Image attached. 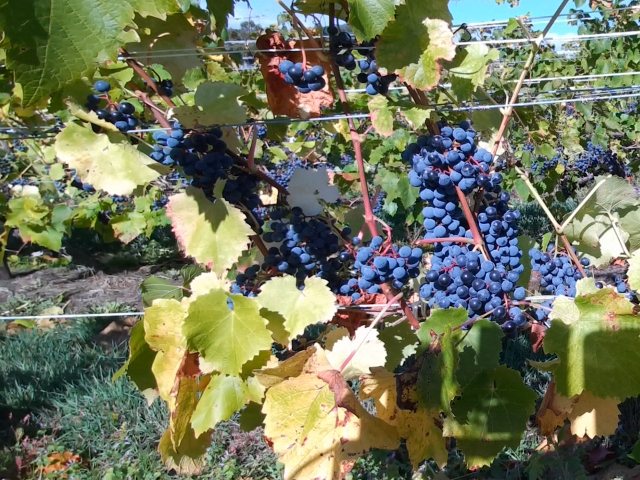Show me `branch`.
<instances>
[{
	"instance_id": "1",
	"label": "branch",
	"mask_w": 640,
	"mask_h": 480,
	"mask_svg": "<svg viewBox=\"0 0 640 480\" xmlns=\"http://www.w3.org/2000/svg\"><path fill=\"white\" fill-rule=\"evenodd\" d=\"M334 7H335V3L333 1H330L327 4V14H328V17H329L328 26H329V30H330V35L328 36L330 55H324L320 51H317L316 55L321 60H323L324 62H332L333 73H334L336 86L338 88V97H339L340 104H341V106L344 109L346 114H351L352 113V109H351L350 105L348 104V101H347V98H346V95H345V85L343 83L341 70L337 66L336 60H335V57L337 56V49H336L337 28H336V24H335V22H336V14H335V11H334Z\"/></svg>"
},
{
	"instance_id": "2",
	"label": "branch",
	"mask_w": 640,
	"mask_h": 480,
	"mask_svg": "<svg viewBox=\"0 0 640 480\" xmlns=\"http://www.w3.org/2000/svg\"><path fill=\"white\" fill-rule=\"evenodd\" d=\"M347 126H348V130L350 132V137L352 140V145L354 148V156H355V162H356V168H357V173L359 176V186L361 188V193H362V203L364 205L365 208V216H366V220L369 226V230L370 233L373 236H376L378 234V230L376 227V223L372 214V206H371V202L369 200V191H368V185L366 183V174H365V170H364V166H363V160H362V153H361V146H360V142H359V137L357 134V130L355 127V123L353 119H348L347 120Z\"/></svg>"
},
{
	"instance_id": "3",
	"label": "branch",
	"mask_w": 640,
	"mask_h": 480,
	"mask_svg": "<svg viewBox=\"0 0 640 480\" xmlns=\"http://www.w3.org/2000/svg\"><path fill=\"white\" fill-rule=\"evenodd\" d=\"M514 169L517 171L519 177L525 182V184L527 185V187L532 191V193L534 194V196L536 197L538 203L541 205L546 217L549 219V221L552 223L553 228L555 229V231L558 233V235L560 236L561 240L564 242V244L566 245V247L568 248V251L570 253V256L575 264V266L579 269L581 275L584 278H588L589 276H586L584 273V267L583 265L579 262V259L577 258L576 255H574L573 251L571 250V247H573V245L569 242V240L566 238L565 233L562 231V229L560 228V226L558 225L556 219L553 217V215L550 213L546 202L543 200L542 196L540 195V193L538 192V190L536 189V187L532 184V182L529 180L528 177L525 176V174L523 173L522 169L518 166L515 165Z\"/></svg>"
},
{
	"instance_id": "4",
	"label": "branch",
	"mask_w": 640,
	"mask_h": 480,
	"mask_svg": "<svg viewBox=\"0 0 640 480\" xmlns=\"http://www.w3.org/2000/svg\"><path fill=\"white\" fill-rule=\"evenodd\" d=\"M454 187L458 192V195H459L458 199H459V201L461 203L462 209L464 210V218L468 221L469 227L471 229V233H472V235L474 237L473 243L475 245H478V244L481 243V245L483 246V249L485 250V252L487 254L488 260L490 261V257H489V255L487 253V249H486L484 240H482L481 234H480V232L478 230V227L476 225L475 218L473 216H471V208L469 207L468 200H467L466 196L463 194V192L457 186H454Z\"/></svg>"
},
{
	"instance_id": "5",
	"label": "branch",
	"mask_w": 640,
	"mask_h": 480,
	"mask_svg": "<svg viewBox=\"0 0 640 480\" xmlns=\"http://www.w3.org/2000/svg\"><path fill=\"white\" fill-rule=\"evenodd\" d=\"M227 154L229 156H231L233 159H235L237 162H239L240 164H242L243 166L248 168L251 173L255 174L257 177L261 178L263 181H265L268 184H270L279 193L283 194L284 196H288L289 195V192L286 190V187L283 184H280L279 182H275L274 180H272L268 176L264 175L262 172L258 171L256 168H254L253 165H251L245 159H243L240 156H238L231 149L227 150Z\"/></svg>"
},
{
	"instance_id": "6",
	"label": "branch",
	"mask_w": 640,
	"mask_h": 480,
	"mask_svg": "<svg viewBox=\"0 0 640 480\" xmlns=\"http://www.w3.org/2000/svg\"><path fill=\"white\" fill-rule=\"evenodd\" d=\"M540 46H541V42H537L533 46L532 53H531L529 59L526 62L525 68H524V70H523V72H522V74H521V76H520V78L518 80V84H517V86H516V88L514 90L513 95L510 98V103H515V101H516V99H517V97H518V95L520 93V90H521V88L523 86V83L525 81V78L527 77V74H528V72H529V70L531 68L532 62L535 60V57L537 55V51H538Z\"/></svg>"
},
{
	"instance_id": "7",
	"label": "branch",
	"mask_w": 640,
	"mask_h": 480,
	"mask_svg": "<svg viewBox=\"0 0 640 480\" xmlns=\"http://www.w3.org/2000/svg\"><path fill=\"white\" fill-rule=\"evenodd\" d=\"M128 64H129V65H131V67H132V68H134V69L138 72V74H139V76L142 78V80H143V81H144L148 86H151V87L155 90V92H156V93H157L161 98H163V99H164V100H165V101H166V102H167L171 107H174V106H175L174 101H173V100H172V99H171L167 94H165V93H164V92L159 88V86H158L155 82L151 81V80L147 77V75L143 72L142 68H141L137 63H135L134 61H132V62H128Z\"/></svg>"
},
{
	"instance_id": "8",
	"label": "branch",
	"mask_w": 640,
	"mask_h": 480,
	"mask_svg": "<svg viewBox=\"0 0 640 480\" xmlns=\"http://www.w3.org/2000/svg\"><path fill=\"white\" fill-rule=\"evenodd\" d=\"M129 85L139 94L140 97H142L147 102V104L149 105V107H150V109L152 111V114H153L154 118L157 119L162 126L170 127V124L168 122H166L163 119L162 115L157 111L156 106L154 105V103L150 99V97L147 96L143 92V90L138 85H136V83L134 81H130Z\"/></svg>"
},
{
	"instance_id": "9",
	"label": "branch",
	"mask_w": 640,
	"mask_h": 480,
	"mask_svg": "<svg viewBox=\"0 0 640 480\" xmlns=\"http://www.w3.org/2000/svg\"><path fill=\"white\" fill-rule=\"evenodd\" d=\"M278 5L280 7H282V9L284 11L287 12V14L294 20L296 21V23L298 24V26L303 30V32L307 35L308 39L310 40V42L312 43L313 46L317 45V41L314 38L312 32L307 28V26L302 22L301 18L298 17L293 11L292 9L287 6L282 0L278 1Z\"/></svg>"
},
{
	"instance_id": "10",
	"label": "branch",
	"mask_w": 640,
	"mask_h": 480,
	"mask_svg": "<svg viewBox=\"0 0 640 480\" xmlns=\"http://www.w3.org/2000/svg\"><path fill=\"white\" fill-rule=\"evenodd\" d=\"M403 84L405 85V87L408 89V93L409 95L412 97L413 101L415 102L416 105H429L431 103V100L428 98V96L419 89H416V91L411 87V85H407L406 82H403Z\"/></svg>"
},
{
	"instance_id": "11",
	"label": "branch",
	"mask_w": 640,
	"mask_h": 480,
	"mask_svg": "<svg viewBox=\"0 0 640 480\" xmlns=\"http://www.w3.org/2000/svg\"><path fill=\"white\" fill-rule=\"evenodd\" d=\"M511 113H512V108H507L506 112L504 113V119H503L502 123L500 124L499 130H498V136L495 138L494 145H493L492 150H491V154L492 155H495L497 153L500 141L503 138L504 129H505L506 125L508 124V122L510 121V117L509 116H510Z\"/></svg>"
},
{
	"instance_id": "12",
	"label": "branch",
	"mask_w": 640,
	"mask_h": 480,
	"mask_svg": "<svg viewBox=\"0 0 640 480\" xmlns=\"http://www.w3.org/2000/svg\"><path fill=\"white\" fill-rule=\"evenodd\" d=\"M570 0H564L560 7L551 15L550 20L545 26V29L542 30L539 34V37H544L546 34L550 32L551 27L553 26L556 18L563 12V10L567 7Z\"/></svg>"
},
{
	"instance_id": "13",
	"label": "branch",
	"mask_w": 640,
	"mask_h": 480,
	"mask_svg": "<svg viewBox=\"0 0 640 480\" xmlns=\"http://www.w3.org/2000/svg\"><path fill=\"white\" fill-rule=\"evenodd\" d=\"M398 303H399V306H400L402 312L405 314V316L408 318V320L411 322V324L416 329H419L421 327V322L419 320H417V318L412 314V312L409 309L406 301L403 298H400L398 300Z\"/></svg>"
},
{
	"instance_id": "14",
	"label": "branch",
	"mask_w": 640,
	"mask_h": 480,
	"mask_svg": "<svg viewBox=\"0 0 640 480\" xmlns=\"http://www.w3.org/2000/svg\"><path fill=\"white\" fill-rule=\"evenodd\" d=\"M250 239L252 241H254L255 245L258 247V249H259V251L261 252L262 255H268L269 254V250L266 248V246L264 245V243L261 240V237L258 234L251 235Z\"/></svg>"
}]
</instances>
